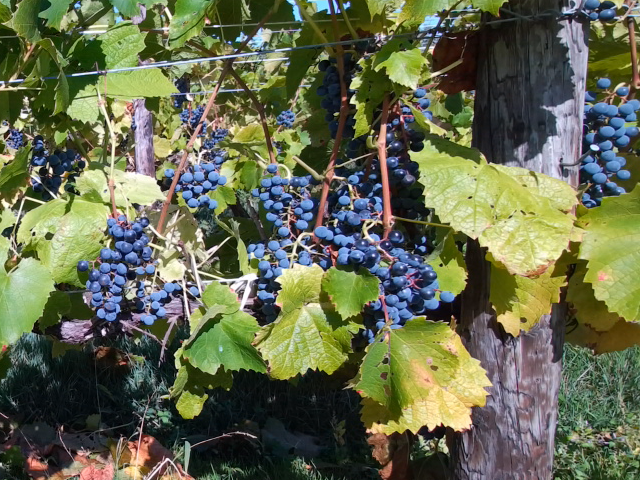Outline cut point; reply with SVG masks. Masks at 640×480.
<instances>
[{"label": "cut point", "mask_w": 640, "mask_h": 480, "mask_svg": "<svg viewBox=\"0 0 640 480\" xmlns=\"http://www.w3.org/2000/svg\"><path fill=\"white\" fill-rule=\"evenodd\" d=\"M114 186H116L121 191V194L123 196L124 203H125V212H129L128 200H127V196L125 194L124 188L120 184H118L115 180H114Z\"/></svg>", "instance_id": "1"}, {"label": "cut point", "mask_w": 640, "mask_h": 480, "mask_svg": "<svg viewBox=\"0 0 640 480\" xmlns=\"http://www.w3.org/2000/svg\"><path fill=\"white\" fill-rule=\"evenodd\" d=\"M305 236H314V233H311V232H304V233L300 234L299 236H297V237L295 238V243L300 242V241L303 239V237H305Z\"/></svg>", "instance_id": "2"}]
</instances>
